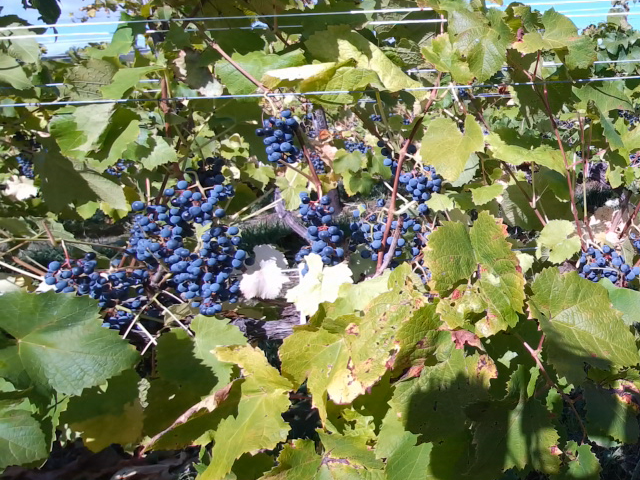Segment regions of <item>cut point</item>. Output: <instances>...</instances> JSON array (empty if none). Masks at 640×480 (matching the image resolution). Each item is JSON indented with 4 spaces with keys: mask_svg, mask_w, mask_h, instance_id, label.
Here are the masks:
<instances>
[{
    "mask_svg": "<svg viewBox=\"0 0 640 480\" xmlns=\"http://www.w3.org/2000/svg\"><path fill=\"white\" fill-rule=\"evenodd\" d=\"M181 172H182V174H188V173H189V174H193V175H194L195 180H196V181H199V177H198V175L196 174V171L186 170V171H181Z\"/></svg>",
    "mask_w": 640,
    "mask_h": 480,
    "instance_id": "7d7e1d6f",
    "label": "cut point"
},
{
    "mask_svg": "<svg viewBox=\"0 0 640 480\" xmlns=\"http://www.w3.org/2000/svg\"><path fill=\"white\" fill-rule=\"evenodd\" d=\"M263 97H264V101H268L269 104L271 105L272 111H276L275 105L271 101V98L267 96V93L265 91L263 92Z\"/></svg>",
    "mask_w": 640,
    "mask_h": 480,
    "instance_id": "6a23745f",
    "label": "cut point"
},
{
    "mask_svg": "<svg viewBox=\"0 0 640 480\" xmlns=\"http://www.w3.org/2000/svg\"><path fill=\"white\" fill-rule=\"evenodd\" d=\"M405 156L410 158V159H412V160H414V162H416V164H419V160L416 157H414V156H412V155H410L408 153H406Z\"/></svg>",
    "mask_w": 640,
    "mask_h": 480,
    "instance_id": "deb38ca7",
    "label": "cut point"
}]
</instances>
